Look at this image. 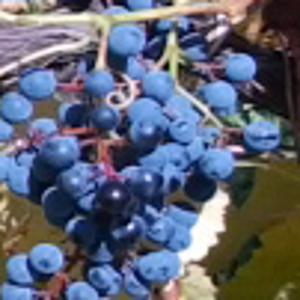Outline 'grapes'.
Segmentation results:
<instances>
[{"mask_svg":"<svg viewBox=\"0 0 300 300\" xmlns=\"http://www.w3.org/2000/svg\"><path fill=\"white\" fill-rule=\"evenodd\" d=\"M17 90L0 95V142L12 140L15 128L28 123L34 111L32 101H45L58 89L54 70L42 66L28 67L17 77Z\"/></svg>","mask_w":300,"mask_h":300,"instance_id":"grapes-2","label":"grapes"},{"mask_svg":"<svg viewBox=\"0 0 300 300\" xmlns=\"http://www.w3.org/2000/svg\"><path fill=\"white\" fill-rule=\"evenodd\" d=\"M125 6H108L105 8H101L98 10V13H117L128 11V9L132 11H139L143 9H150L156 7L157 0H126Z\"/></svg>","mask_w":300,"mask_h":300,"instance_id":"grapes-6","label":"grapes"},{"mask_svg":"<svg viewBox=\"0 0 300 300\" xmlns=\"http://www.w3.org/2000/svg\"><path fill=\"white\" fill-rule=\"evenodd\" d=\"M168 19L145 31L134 22L109 31L120 66L95 69L82 54L78 73L91 97L61 105L53 118L29 122L33 149L0 154V183L8 194L39 204L45 222L87 246L84 280L65 300H104L122 290L131 300L178 278L181 251L190 248L199 209L230 179L235 157L214 146L222 116L235 114L238 89L256 78L247 53L225 55L222 79L187 90L186 81L155 70L169 34Z\"/></svg>","mask_w":300,"mask_h":300,"instance_id":"grapes-1","label":"grapes"},{"mask_svg":"<svg viewBox=\"0 0 300 300\" xmlns=\"http://www.w3.org/2000/svg\"><path fill=\"white\" fill-rule=\"evenodd\" d=\"M281 144V132L277 125L256 120L247 125L241 136L243 149L251 154H272Z\"/></svg>","mask_w":300,"mask_h":300,"instance_id":"grapes-4","label":"grapes"},{"mask_svg":"<svg viewBox=\"0 0 300 300\" xmlns=\"http://www.w3.org/2000/svg\"><path fill=\"white\" fill-rule=\"evenodd\" d=\"M178 40L177 52L185 60L203 64L209 58V47L202 34L198 30H191V24L186 17H181L177 22Z\"/></svg>","mask_w":300,"mask_h":300,"instance_id":"grapes-5","label":"grapes"},{"mask_svg":"<svg viewBox=\"0 0 300 300\" xmlns=\"http://www.w3.org/2000/svg\"><path fill=\"white\" fill-rule=\"evenodd\" d=\"M64 265L62 248L49 243H39L8 259L5 280L0 288L2 300H34L32 288L40 280L60 271Z\"/></svg>","mask_w":300,"mask_h":300,"instance_id":"grapes-3","label":"grapes"}]
</instances>
